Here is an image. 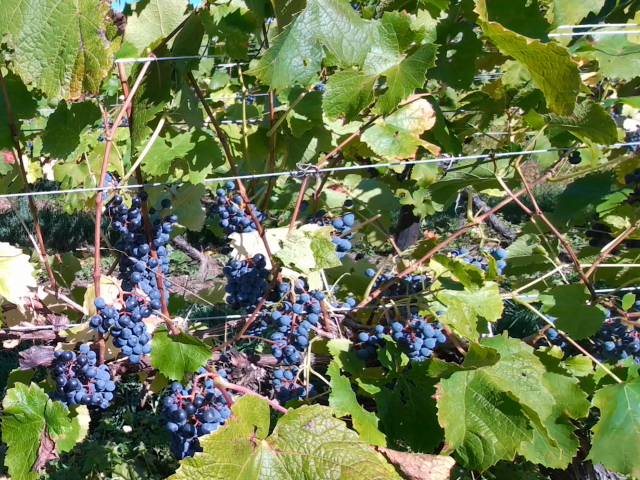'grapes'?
Instances as JSON below:
<instances>
[{
    "label": "grapes",
    "mask_w": 640,
    "mask_h": 480,
    "mask_svg": "<svg viewBox=\"0 0 640 480\" xmlns=\"http://www.w3.org/2000/svg\"><path fill=\"white\" fill-rule=\"evenodd\" d=\"M427 281V276L425 274H409L403 278V282L405 284H412L414 289H418L421 284H424Z\"/></svg>",
    "instance_id": "obj_12"
},
{
    "label": "grapes",
    "mask_w": 640,
    "mask_h": 480,
    "mask_svg": "<svg viewBox=\"0 0 640 480\" xmlns=\"http://www.w3.org/2000/svg\"><path fill=\"white\" fill-rule=\"evenodd\" d=\"M217 204L213 206V211L219 213V225L227 228L229 232L243 234H253L257 230V223L252 218L256 217L258 222H263L266 219V214L259 210L254 204H249L241 210H237L235 204L242 202V196L235 194L233 196V203L226 201L225 190L218 188L216 190Z\"/></svg>",
    "instance_id": "obj_8"
},
{
    "label": "grapes",
    "mask_w": 640,
    "mask_h": 480,
    "mask_svg": "<svg viewBox=\"0 0 640 480\" xmlns=\"http://www.w3.org/2000/svg\"><path fill=\"white\" fill-rule=\"evenodd\" d=\"M162 285H163V297H164V301H165V306H169L168 301H169L170 293L166 292V289L172 288V282L171 281L162 280Z\"/></svg>",
    "instance_id": "obj_15"
},
{
    "label": "grapes",
    "mask_w": 640,
    "mask_h": 480,
    "mask_svg": "<svg viewBox=\"0 0 640 480\" xmlns=\"http://www.w3.org/2000/svg\"><path fill=\"white\" fill-rule=\"evenodd\" d=\"M593 344L592 356L598 362L607 360L611 355L627 360L631 354L635 362L640 360V338L637 337V330L618 319L600 324Z\"/></svg>",
    "instance_id": "obj_6"
},
{
    "label": "grapes",
    "mask_w": 640,
    "mask_h": 480,
    "mask_svg": "<svg viewBox=\"0 0 640 480\" xmlns=\"http://www.w3.org/2000/svg\"><path fill=\"white\" fill-rule=\"evenodd\" d=\"M266 262L262 254H255L249 259L230 260L224 267L229 282L225 291L231 295L226 302L233 310L245 306L248 314H253L258 303L268 292L269 272L265 270Z\"/></svg>",
    "instance_id": "obj_5"
},
{
    "label": "grapes",
    "mask_w": 640,
    "mask_h": 480,
    "mask_svg": "<svg viewBox=\"0 0 640 480\" xmlns=\"http://www.w3.org/2000/svg\"><path fill=\"white\" fill-rule=\"evenodd\" d=\"M483 257L481 255H477L475 259L472 256H467L462 259L464 264L469 263L471 266H475L476 268H480L482 266Z\"/></svg>",
    "instance_id": "obj_13"
},
{
    "label": "grapes",
    "mask_w": 640,
    "mask_h": 480,
    "mask_svg": "<svg viewBox=\"0 0 640 480\" xmlns=\"http://www.w3.org/2000/svg\"><path fill=\"white\" fill-rule=\"evenodd\" d=\"M326 300V293L319 290H310L308 293H301L296 297V302L282 300L280 307L284 311H292L294 314H301L303 311L308 314L305 321H301L298 327L292 323V317L283 312L273 311L271 318L278 322V329L270 334L271 356L273 358H283L286 365H299L302 361L300 348H305L309 344L308 332L319 322L322 315L320 302Z\"/></svg>",
    "instance_id": "obj_4"
},
{
    "label": "grapes",
    "mask_w": 640,
    "mask_h": 480,
    "mask_svg": "<svg viewBox=\"0 0 640 480\" xmlns=\"http://www.w3.org/2000/svg\"><path fill=\"white\" fill-rule=\"evenodd\" d=\"M113 203L117 207L113 228L118 230V235L122 238V241L116 243V248L122 251L119 254L120 288L132 292L140 284L141 291L149 301L140 303L136 296L127 297L125 306L132 314L131 317L128 314L119 315L117 309L106 305L103 298H95L94 305L103 315H92L89 326L93 329L102 327L105 332L110 329L113 345L122 349L130 363H138L140 355L151 351L149 342L152 334L147 332V325L141 322V318H148L162 307V294L156 286V274L159 268L162 273H169L170 259L166 257L168 249L164 244L170 240L172 224L178 221V214L165 215V222L153 227L152 248L157 250L158 255V259H154L148 256L150 246L147 244L146 224L142 215V199L134 197L129 209L123 204L122 196L115 194Z\"/></svg>",
    "instance_id": "obj_1"
},
{
    "label": "grapes",
    "mask_w": 640,
    "mask_h": 480,
    "mask_svg": "<svg viewBox=\"0 0 640 480\" xmlns=\"http://www.w3.org/2000/svg\"><path fill=\"white\" fill-rule=\"evenodd\" d=\"M385 325L383 323H378L376 325V331L373 335L372 333L360 332L358 334V339L360 341H367L368 343H379L381 338L384 336Z\"/></svg>",
    "instance_id": "obj_11"
},
{
    "label": "grapes",
    "mask_w": 640,
    "mask_h": 480,
    "mask_svg": "<svg viewBox=\"0 0 640 480\" xmlns=\"http://www.w3.org/2000/svg\"><path fill=\"white\" fill-rule=\"evenodd\" d=\"M172 396H166L163 403V417L168 419L166 431L175 433L170 443V451L177 461L202 452L199 443L204 434H211L230 415L228 398L212 380H204L196 387L194 398L188 386L181 382L172 384Z\"/></svg>",
    "instance_id": "obj_2"
},
{
    "label": "grapes",
    "mask_w": 640,
    "mask_h": 480,
    "mask_svg": "<svg viewBox=\"0 0 640 480\" xmlns=\"http://www.w3.org/2000/svg\"><path fill=\"white\" fill-rule=\"evenodd\" d=\"M72 349L74 351H53V356L61 361L53 370L56 397L63 403L82 402L107 408L115 391L109 366L98 364L96 352L90 350L88 343L74 342Z\"/></svg>",
    "instance_id": "obj_3"
},
{
    "label": "grapes",
    "mask_w": 640,
    "mask_h": 480,
    "mask_svg": "<svg viewBox=\"0 0 640 480\" xmlns=\"http://www.w3.org/2000/svg\"><path fill=\"white\" fill-rule=\"evenodd\" d=\"M294 372L286 368H277L274 371L272 382L275 384L273 388L274 396L281 403H287L289 399L304 400L307 396L315 398L317 391L312 382H306L303 387L301 385L291 386L293 382Z\"/></svg>",
    "instance_id": "obj_9"
},
{
    "label": "grapes",
    "mask_w": 640,
    "mask_h": 480,
    "mask_svg": "<svg viewBox=\"0 0 640 480\" xmlns=\"http://www.w3.org/2000/svg\"><path fill=\"white\" fill-rule=\"evenodd\" d=\"M391 276H393V273L391 271H385L374 278L373 285L375 287H378L383 282H386Z\"/></svg>",
    "instance_id": "obj_14"
},
{
    "label": "grapes",
    "mask_w": 640,
    "mask_h": 480,
    "mask_svg": "<svg viewBox=\"0 0 640 480\" xmlns=\"http://www.w3.org/2000/svg\"><path fill=\"white\" fill-rule=\"evenodd\" d=\"M410 322L415 328L414 336L409 330H404V324L397 320L390 322L391 335L406 344L407 352L416 362H422L430 356L431 350H437L439 344L446 342V336L440 323L432 325L419 312L410 315Z\"/></svg>",
    "instance_id": "obj_7"
},
{
    "label": "grapes",
    "mask_w": 640,
    "mask_h": 480,
    "mask_svg": "<svg viewBox=\"0 0 640 480\" xmlns=\"http://www.w3.org/2000/svg\"><path fill=\"white\" fill-rule=\"evenodd\" d=\"M355 215L351 211H344L342 218H334L332 225L336 230L342 231L341 235H334L332 242L334 243V253L337 258H344L346 252H349L352 248V243L348 241L353 237V232L350 230V226L354 224Z\"/></svg>",
    "instance_id": "obj_10"
}]
</instances>
